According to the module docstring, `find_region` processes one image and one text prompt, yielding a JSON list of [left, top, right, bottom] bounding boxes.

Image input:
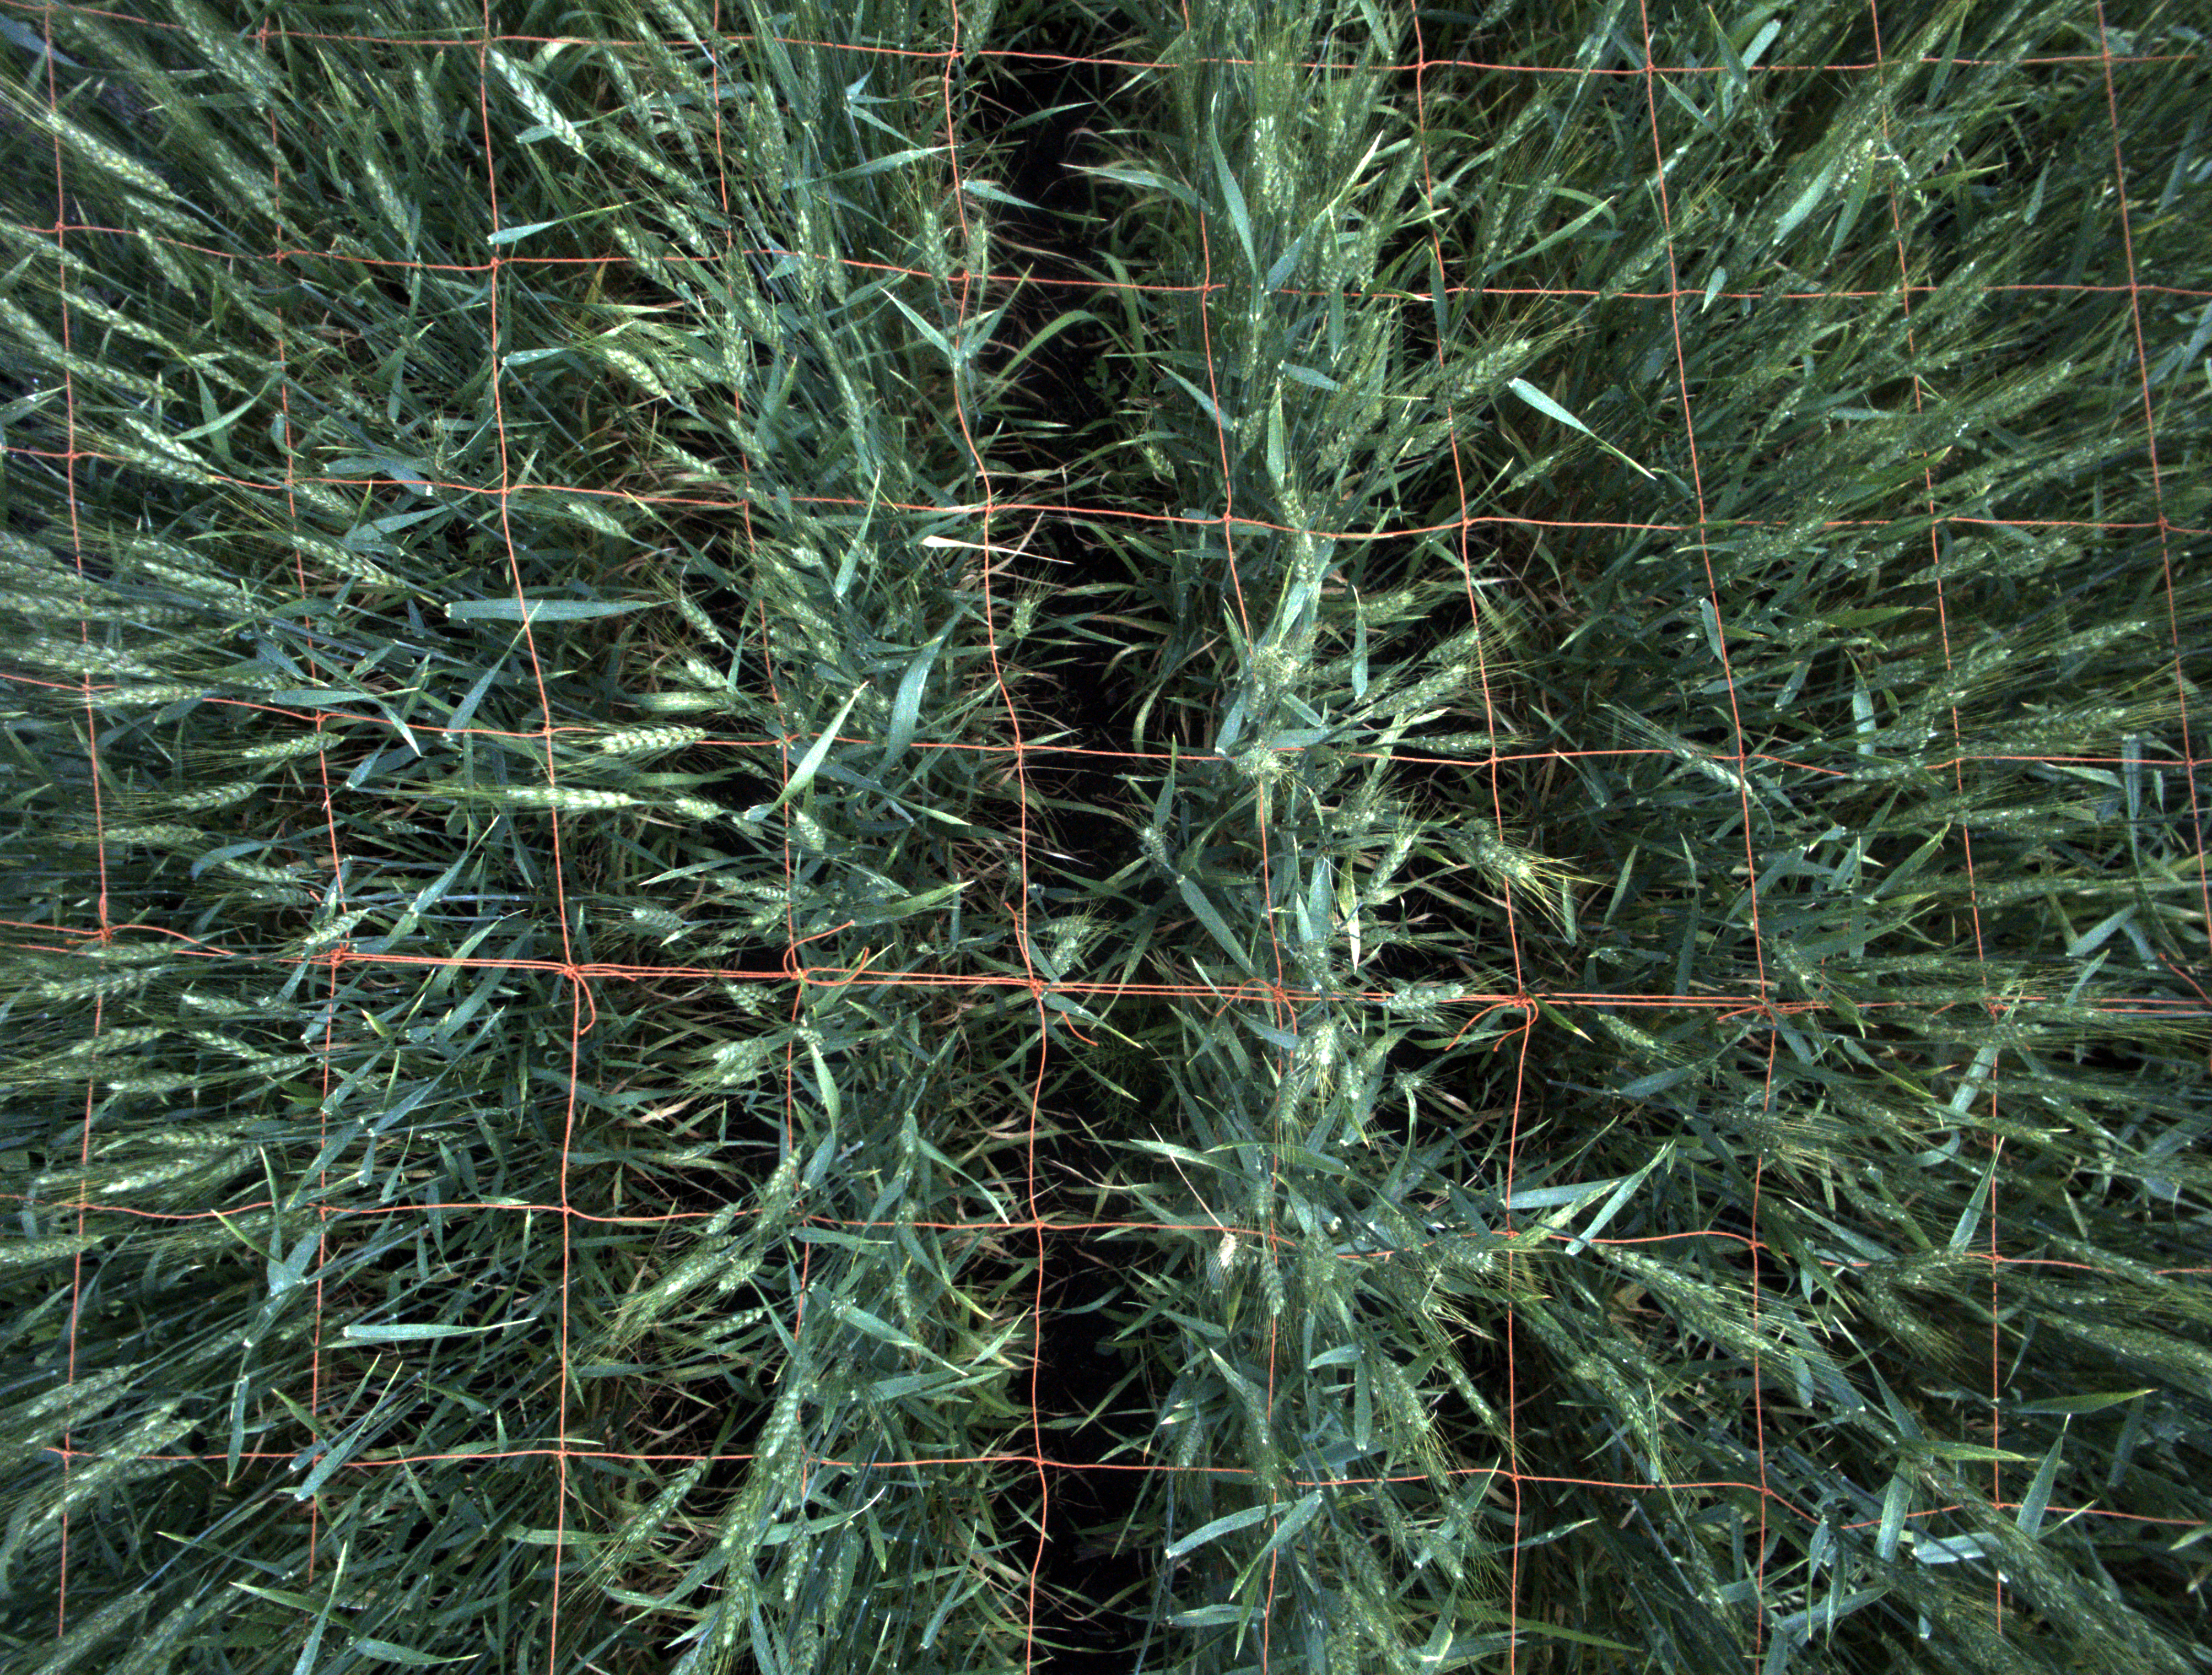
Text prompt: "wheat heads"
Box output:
[[792, 708, 813, 744], [383, 0, 407, 28], [113, 1457, 187, 1485], [288, 325, 349, 361], [1673, 1300, 1773, 1356], [1318, 226, 1338, 285], [1251, 114, 1279, 199], [1276, 660, 1302, 694], [1310, 758, 1345, 796], [33, 1590, 136, 1670], [2049, 1232, 2164, 1288], [1295, 952, 1342, 986], [34, 1168, 102, 1188], [2037, 619, 2150, 659], [1975, 1116, 2051, 1145], [26, 1383, 135, 1443], [1592, 227, 1680, 307], [1774, 1, 1827, 58], [1355, 216, 1378, 292], [1890, 1273, 1934, 1295], [760, 1190, 782, 1228], [1380, 1355, 1430, 1434], [1374, 1250, 1420, 1302], [691, 946, 732, 957], [1442, 831, 1475, 865], [1871, 679, 1916, 690], [143, 561, 246, 602], [1782, 815, 1818, 829], [1918, 1455, 2047, 1570], [1996, 537, 2065, 576], [300, 907, 368, 951], [1943, 741, 2043, 758], [227, 34, 289, 91], [428, 472, 451, 505], [801, 3, 822, 38], [1373, 1485, 1404, 1549], [675, 1140, 721, 1163], [1, 531, 60, 567], [1396, 734, 1492, 760], [255, 995, 309, 1022], [359, 1403, 396, 1437], [604, 51, 653, 132], [2018, 3, 2080, 37], [656, 445, 724, 482], [290, 535, 412, 592], [1909, 1020, 2058, 1046], [1364, 926, 1401, 948], [736, 189, 769, 252], [1759, 1195, 1799, 1224], [333, 232, 386, 261], [1418, 1527, 1465, 1579], [1988, 1272, 2108, 1308], [1819, 533, 1859, 580], [196, 1141, 271, 1189], [66, 357, 185, 407], [2105, 477, 2190, 520], [222, 341, 278, 375], [125, 416, 209, 466], [1006, 858, 1026, 885], [1830, 141, 1870, 198], [1838, 1289, 1887, 1333], [221, 859, 300, 883], [1720, 1067, 1765, 1096], [1926, 648, 2013, 700], [795, 208, 818, 301], [181, 990, 250, 1019], [803, 49, 822, 121], [249, 125, 298, 183], [1293, 2, 1320, 61], [1687, 1538, 1732, 1624], [1951, 209, 2017, 253], [1876, 954, 1941, 972], [851, 687, 869, 709], [756, 138, 784, 205], [171, 2, 258, 89], [1665, 742, 1753, 795], [1389, 982, 1465, 1010], [1460, 819, 1491, 835], [822, 1550, 844, 1615], [0, 1236, 104, 1269], [363, 1071, 391, 1083], [613, 225, 673, 292], [185, 1032, 267, 1063], [760, 82, 785, 147], [1853, 27, 1941, 134], [897, 454, 917, 491], [1341, 1061, 1367, 1102], [650, 695, 719, 717], [780, 1425, 803, 1479], [102, 685, 215, 709], [789, 1618, 821, 1675], [334, 385, 394, 431], [29, 1363, 136, 1423], [870, 693, 891, 715], [82, 937, 175, 967], [203, 1112, 254, 1138], [379, 78, 414, 125], [1865, 440, 1908, 475], [719, 1528, 754, 1651], [677, 594, 723, 651], [1234, 744, 1284, 780], [1963, 41, 2031, 106], [1346, 319, 1380, 396], [189, 353, 251, 397], [323, 47, 363, 98], [1333, 1523, 1387, 1599], [686, 2, 726, 44], [716, 1484, 754, 1550], [1344, 73, 1380, 156], [1979, 1541, 2060, 1623], [765, 625, 805, 652], [863, 721, 884, 740], [1766, 176, 1802, 220], [1504, 171, 1559, 253], [1502, 447, 1563, 492], [699, 1198, 739, 1241], [110, 1072, 209, 1094], [417, 1129, 460, 1143], [1289, 629, 1318, 660], [1838, 1184, 1902, 1224], [378, 820, 424, 839], [1825, 1394, 1898, 1444], [1768, 942, 1816, 981], [1851, 541, 1903, 584], [111, 1399, 176, 1448], [699, 1307, 764, 1343], [1881, 985, 1991, 1007], [1998, 358, 2071, 421], [412, 69, 446, 156], [1327, 1588, 1361, 1672], [1224, 271, 1237, 307], [1579, 0, 1626, 71], [231, 290, 285, 344], [1361, 588, 1416, 626], [915, 941, 935, 956], [662, 87, 702, 170], [1729, 231, 1759, 271], [635, 20, 709, 105], [243, 734, 348, 763], [1146, 447, 1175, 479], [1940, 1602, 2009, 1674], [2020, 438, 2123, 487], [852, 537, 879, 569], [90, 606, 197, 632], [1254, 646, 1279, 677], [36, 635, 161, 679], [1854, 1553, 1954, 1611], [1965, 802, 2062, 819], [1892, 154, 1919, 197], [1280, 491, 1306, 532], [281, 1305, 320, 1341], [1899, 350, 1963, 378], [1727, 366, 1766, 397], [1475, 0, 1514, 30], [1356, 836, 1409, 910], [238, 1052, 304, 1081], [2011, 1069, 2135, 1105], [1941, 266, 1994, 310], [207, 138, 272, 207], [1410, 360, 1458, 398], [137, 632, 244, 661], [604, 348, 675, 402], [1780, 440, 1840, 491], [1906, 409, 1965, 458], [1215, 1026, 1232, 1046], [757, 1387, 800, 1465], [1434, 337, 1531, 414], [1235, 409, 1264, 455], [1242, 1422, 1272, 1490], [1896, 1007, 1947, 1026], [1422, 628, 1480, 668], [746, 902, 790, 928], [1888, 792, 1970, 824], [658, 4, 702, 49], [672, 794, 723, 823], [697, 1232, 737, 1251], [457, 1048, 492, 1069], [42, 109, 173, 201], [767, 643, 795, 662], [1264, 45, 1294, 111], [1779, 23, 1831, 72], [1180, 85, 1199, 170], [1832, 73, 1870, 130], [1180, 34, 1200, 82], [812, 324, 862, 436], [1277, 165, 1294, 210], [1527, 1318, 1587, 1372], [664, 207, 709, 252], [1823, 784, 1865, 804], [826, 1293, 856, 1321], [708, 1035, 764, 1061], [721, 1246, 768, 1289], [838, 696, 855, 716], [48, 1058, 138, 1087], [724, 981, 761, 1016], [1851, 762, 1924, 785], [1280, 1071, 1299, 1126], [1877, 672, 1923, 680], [1888, 690, 1967, 731], [1902, 538, 1988, 585], [398, 332, 440, 371], [1406, 415, 1457, 456], [104, 824, 206, 848], [1963, 1077, 2046, 1096], [1320, 1229, 1336, 1285], [1595, 1338, 1669, 1386], [1382, 105, 1414, 148], [1599, 948, 1622, 966], [1592, 1241, 1724, 1307], [1439, 1494, 1478, 1548], [1261, 1249, 1285, 1317], [1337, 1027, 1369, 1050], [258, 201, 305, 241], [858, 887, 905, 900], [0, 218, 95, 277], [1856, 283, 1900, 345], [488, 45, 586, 160], [1476, 835, 1531, 880], [1903, 1249, 1968, 1272], [897, 1201, 917, 1224], [1749, 100, 1774, 157], [1388, 1207, 1425, 1256], [172, 779, 261, 818], [1754, 276, 1796, 315], [187, 1572, 258, 1630], [651, 348, 695, 408], [663, 1242, 726, 1297], [1216, 1233, 1238, 1273], [735, 759, 773, 784], [623, 1457, 712, 1548], [687, 355, 724, 386], [1252, 354, 1269, 405], [825, 243, 849, 304], [1175, 1418, 1203, 1472], [780, 1513, 813, 1604], [1247, 683, 1268, 721], [1710, 1103, 1784, 1133], [143, 1132, 241, 1153], [434, 0, 457, 22], [689, 658, 728, 688], [1997, 820, 2065, 839], [1778, 433, 1824, 474], [363, 159, 414, 243], [251, 884, 314, 907], [1878, 327, 1909, 358], [730, 812, 765, 842], [1425, 149, 1457, 181], [799, 516, 827, 539], [1872, 634, 1930, 652], [2129, 1159, 2210, 1183], [1439, 1351, 1497, 1425], [297, 478, 355, 524], [1594, 1011, 1657, 1049], [1299, 245, 1320, 299], [891, 1273, 913, 1323], [791, 547, 821, 569], [1252, 1181, 1269, 1222], [2042, 1313, 2209, 1367], [182, 1323, 254, 1369], [1013, 596, 1035, 640], [323, 1306, 365, 1331], [193, 1215, 290, 1256], [1372, 375, 1432, 466], [1847, 424, 1878, 464], [2078, 1579, 2191, 1674], [887, 0, 910, 56], [1883, 1156, 1944, 1199], [1358, 679, 1388, 709], [1374, 663, 1466, 720], [722, 312, 747, 343], [1344, 1580, 1414, 1672], [1860, 1272, 1918, 1338], [631, 910, 686, 930], [963, 0, 994, 63], [1974, 878, 2085, 911], [1929, 289, 1990, 347], [1943, 959, 1997, 976], [1237, 325, 1261, 385], [434, 436, 457, 478], [1737, 1129, 1782, 1152], [1331, 2, 1356, 29], [741, 982, 781, 1004], [715, 875, 748, 893], [1438, 1229, 1494, 1276], [371, 1483, 415, 1516], [596, 723, 707, 755], [1375, 143, 1418, 216], [747, 885, 787, 902], [124, 194, 213, 239], [1592, 1357, 1649, 1446], [1142, 824, 1166, 862], [883, 610, 901, 632], [1775, 619, 1833, 648], [2147, 419, 2212, 444], [1764, 514, 1825, 563], [1046, 913, 1089, 940], [1916, 453, 2013, 504], [1392, 1071, 1423, 1093], [61, 291, 169, 348], [794, 601, 838, 631], [1874, 657, 1924, 670], [0, 591, 101, 624], [1313, 1025, 1339, 1072], [1321, 96, 1347, 159], [715, 929, 754, 943], [745, 486, 776, 517], [99, 1158, 214, 1197], [1703, 413, 1751, 468], [900, 604, 917, 635], [37, 969, 169, 1002], [1758, 386, 1802, 438], [73, 1414, 202, 1483], [1871, 727, 1936, 748], [136, 219, 196, 294], [113, 1597, 193, 1671], [1542, 1302, 1605, 1330], [566, 502, 631, 542], [899, 1126, 915, 1154], [792, 805, 825, 851], [131, 535, 217, 576], [764, 1153, 802, 1193], [1329, 245, 1359, 292], [2076, 985, 2102, 1000], [1478, 193, 1510, 264], [71, 13, 194, 127], [1239, 0, 1259, 28], [1990, 706, 2125, 739], [734, 1048, 767, 1070], [1304, 659, 1353, 685], [504, 781, 636, 814], [608, 134, 711, 205], [785, 885, 820, 899], [817, 639, 836, 663], [1332, 807, 1382, 832], [1953, 1155, 2030, 1189], [1291, 534, 1315, 593], [1830, 1084, 1898, 1130], [1731, 528, 1762, 575], [1310, 944, 1324, 975], [773, 564, 808, 599], [119, 443, 226, 489], [719, 1067, 761, 1092], [1393, 981, 1441, 1025], [29, 1486, 87, 1541], [215, 671, 286, 692], [1301, 1220, 1320, 1291], [1985, 2, 2028, 48], [821, 627, 838, 644], [728, 417, 768, 461], [1246, 1378, 1275, 1443], [744, 299, 793, 357], [807, 921, 831, 935], [61, 1029, 172, 1063], [0, 561, 120, 600], [1899, 873, 1966, 899], [720, 346, 749, 384], [919, 203, 947, 286], [1495, 100, 1542, 153], [221, 600, 273, 621], [1783, 305, 1822, 353], [1315, 398, 1382, 473], [0, 301, 76, 375], [1199, 0, 1222, 43], [964, 214, 986, 279], [4, 649, 126, 679], [1910, 809, 1931, 829], [1049, 938, 1080, 975], [1880, 1628, 1920, 1674], [1910, 132, 1964, 180], [792, 1030, 825, 1045], [834, 1347, 855, 1381], [1915, 263, 1973, 318], [2018, 1002, 2112, 1026]]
